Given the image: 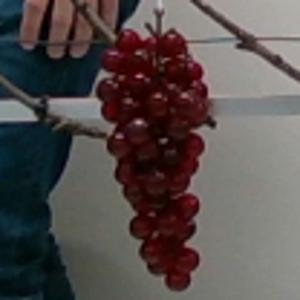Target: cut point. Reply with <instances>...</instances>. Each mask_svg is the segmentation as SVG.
<instances>
[{"mask_svg":"<svg viewBox=\"0 0 300 300\" xmlns=\"http://www.w3.org/2000/svg\"><path fill=\"white\" fill-rule=\"evenodd\" d=\"M167 9L163 8V0H157V6L152 8V14L155 17V37L162 39L163 31V17L166 15Z\"/></svg>","mask_w":300,"mask_h":300,"instance_id":"cut-point-1","label":"cut point"}]
</instances>
